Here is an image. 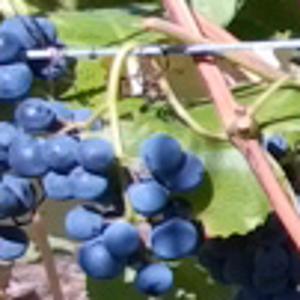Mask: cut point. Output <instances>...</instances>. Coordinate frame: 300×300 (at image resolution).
<instances>
[{
    "instance_id": "1",
    "label": "cut point",
    "mask_w": 300,
    "mask_h": 300,
    "mask_svg": "<svg viewBox=\"0 0 300 300\" xmlns=\"http://www.w3.org/2000/svg\"><path fill=\"white\" fill-rule=\"evenodd\" d=\"M134 49L145 57L148 63V69L151 78L159 86L173 110L179 118L185 123L187 127L195 131L203 138L225 143L227 135L225 133L210 130L192 118L178 97L175 95L169 83L164 79L158 68V60L155 57L153 50L147 47L144 42L138 37H132L125 45H123L117 52L116 56L109 63L107 89H108V112H109V134L110 139L114 143L120 141L119 134V115H118V94H117V74L119 66L124 62L126 56Z\"/></svg>"
}]
</instances>
